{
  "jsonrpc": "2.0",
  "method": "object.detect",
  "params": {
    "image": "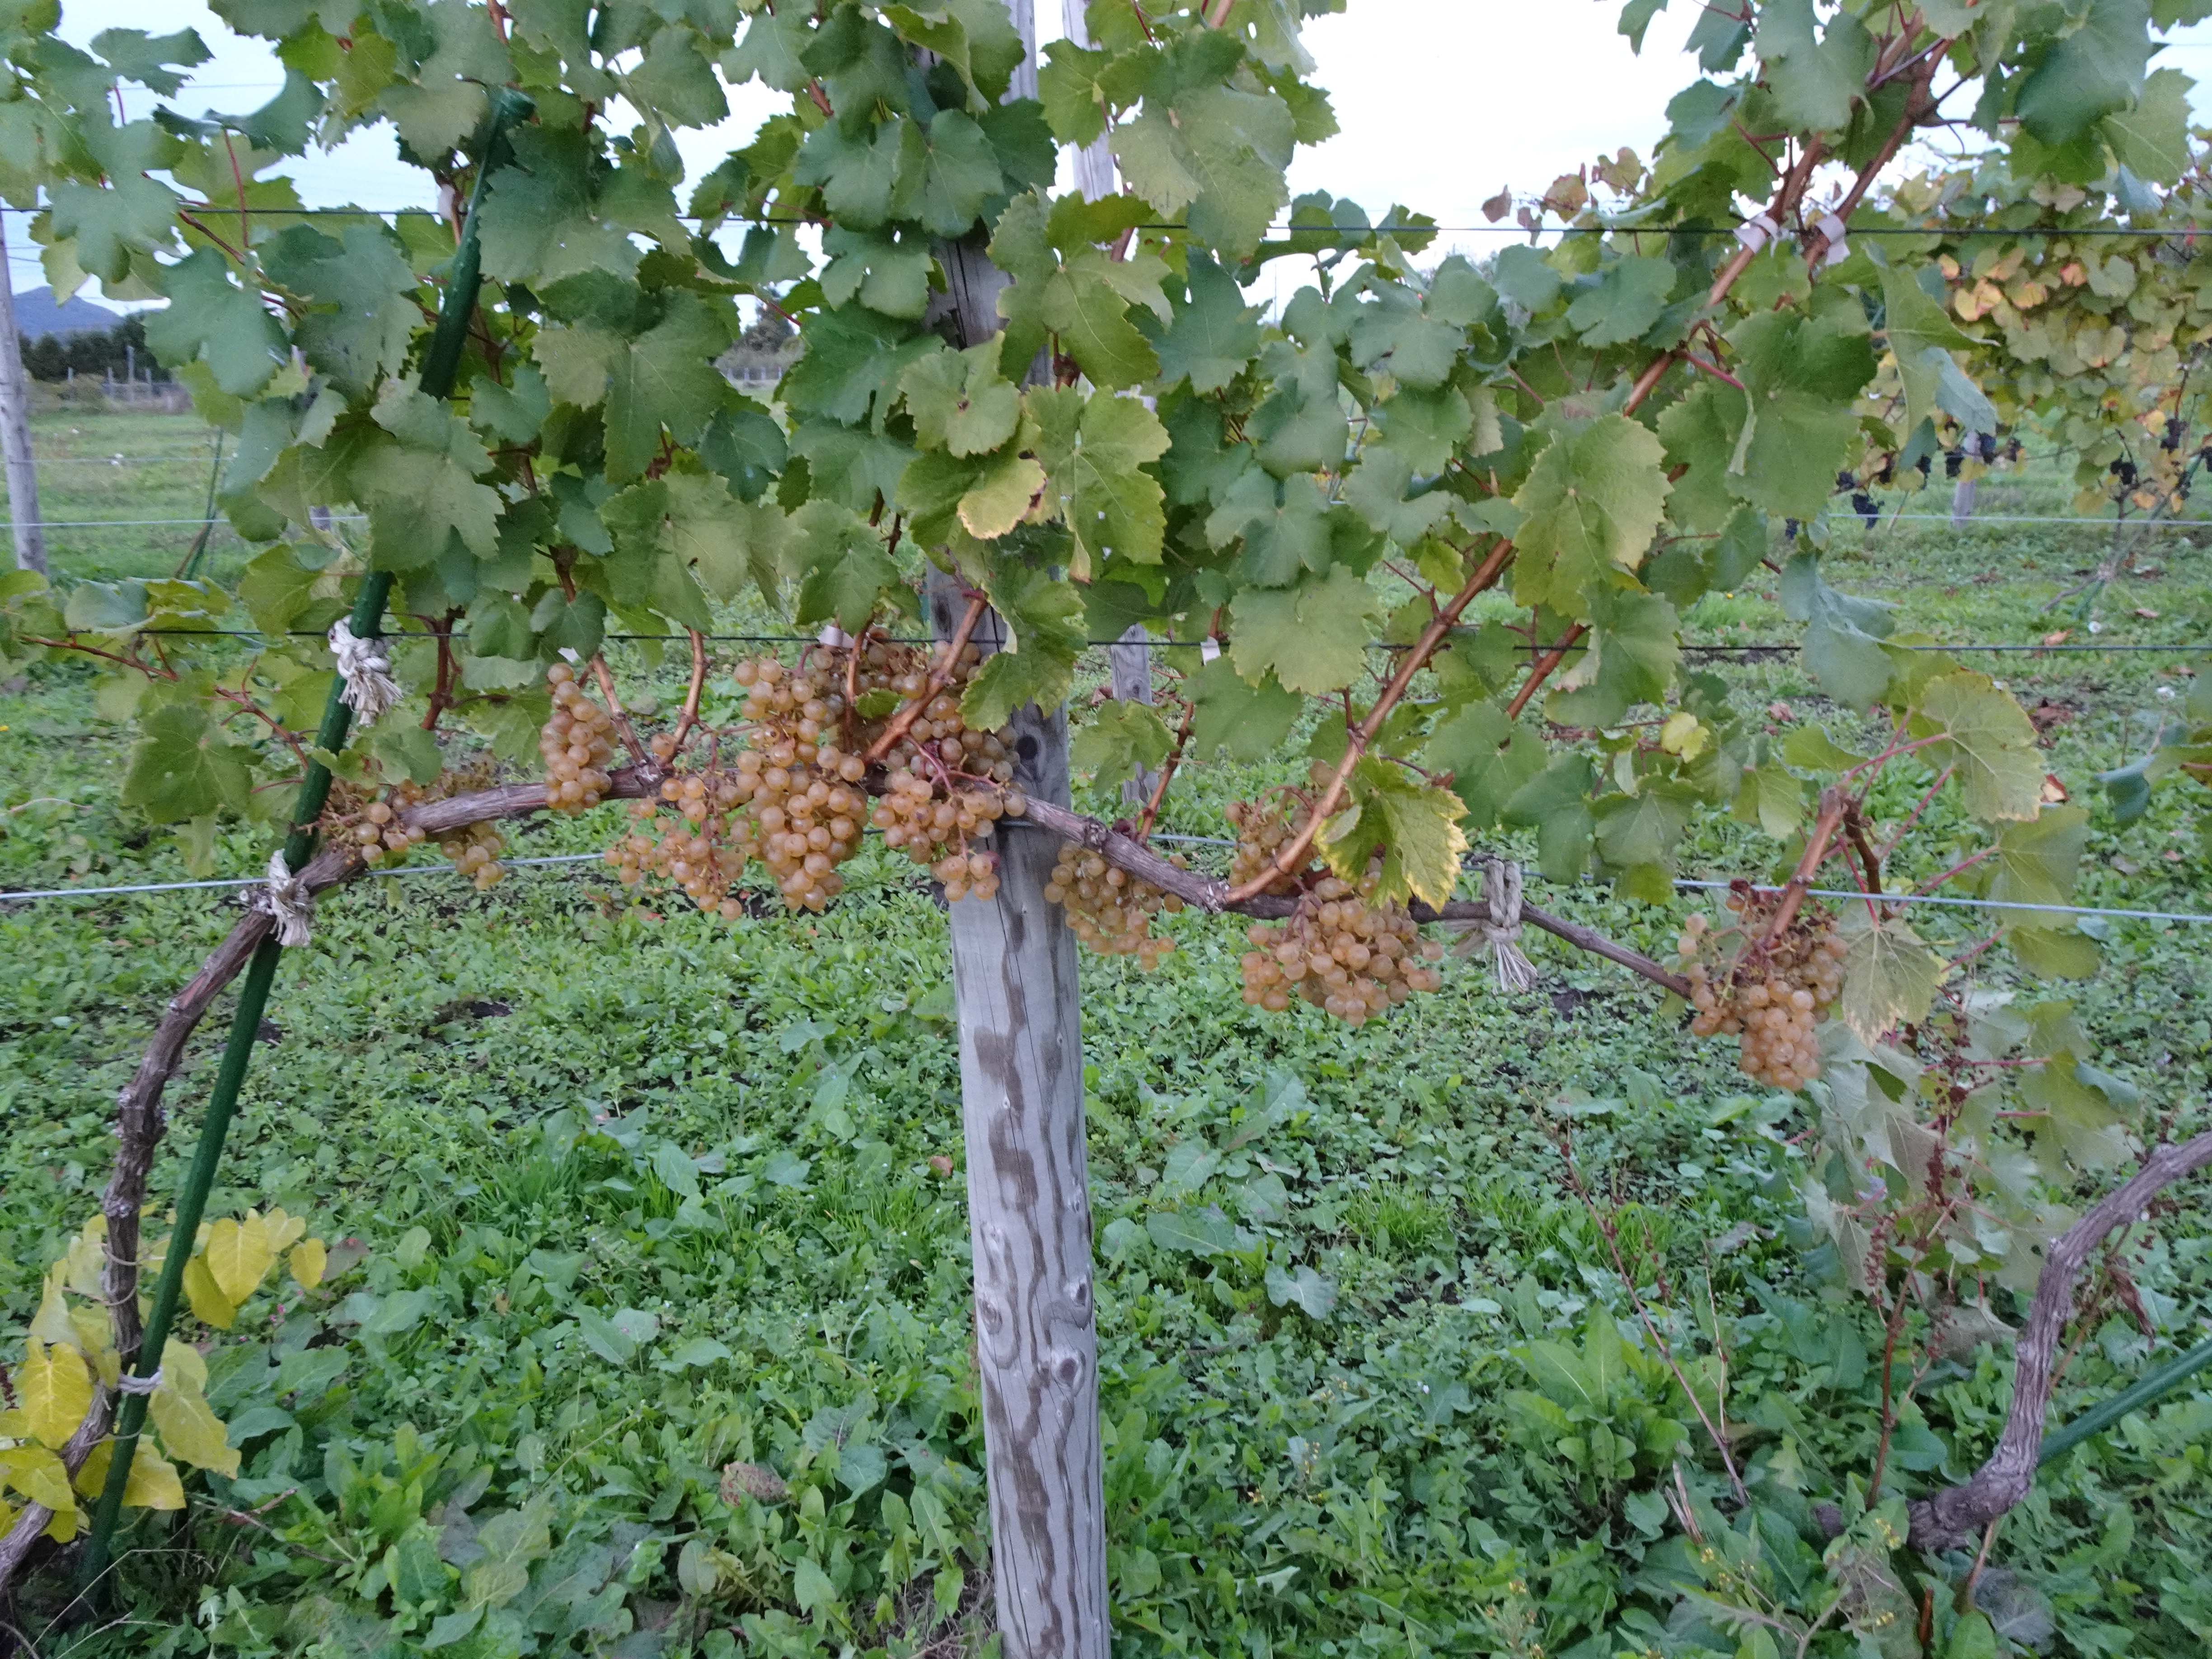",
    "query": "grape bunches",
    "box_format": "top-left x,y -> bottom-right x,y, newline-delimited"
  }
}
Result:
1976,430 -> 1999,468
1043,831 -> 1191,972
1832,469 -> 1860,497
1269,758 -> 1359,834
1239,921 -> 1294,1018
1734,978 -> 1822,1093
723,745 -> 874,916
539,659 -> 620,818
2003,430 -> 2027,464
1358,861 -> 1449,1003
840,628 -> 1003,717
1777,909 -> 1854,1023
1280,856 -> 1390,1032
1724,890 -> 1776,931
2199,439 -> 2212,479
438,779 -> 506,887
1782,516 -> 1806,544
872,750 -> 1002,904
1915,455 -> 1935,494
2163,417 -> 2184,457
1678,912 -> 1752,1038
907,695 -> 1030,814
602,729 -> 743,923
355,786 -> 429,863
2111,454 -> 2140,491
722,639 -> 835,766
1221,798 -> 1309,895
1849,491 -> 1883,530
2176,468 -> 2196,501
1945,445 -> 1963,483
